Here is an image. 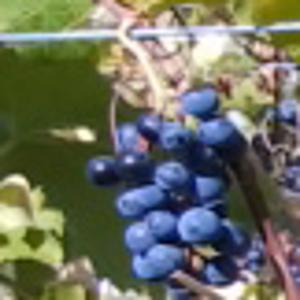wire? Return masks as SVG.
<instances>
[{"label": "wire", "instance_id": "wire-1", "mask_svg": "<svg viewBox=\"0 0 300 300\" xmlns=\"http://www.w3.org/2000/svg\"><path fill=\"white\" fill-rule=\"evenodd\" d=\"M288 34H300V23L133 28L126 32V37L129 40H134L177 39L184 37L275 36Z\"/></svg>", "mask_w": 300, "mask_h": 300}, {"label": "wire", "instance_id": "wire-2", "mask_svg": "<svg viewBox=\"0 0 300 300\" xmlns=\"http://www.w3.org/2000/svg\"><path fill=\"white\" fill-rule=\"evenodd\" d=\"M119 31L116 28L74 29L64 33L8 32L0 35L2 44H68L73 43H115Z\"/></svg>", "mask_w": 300, "mask_h": 300}]
</instances>
